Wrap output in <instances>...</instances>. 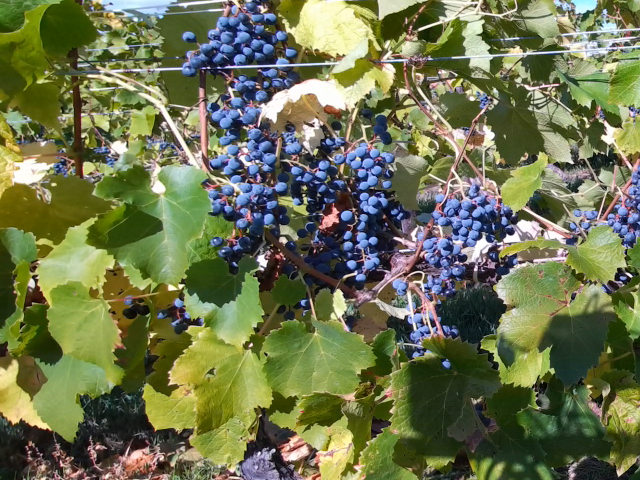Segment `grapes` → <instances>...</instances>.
<instances>
[{
    "label": "grapes",
    "instance_id": "grapes-3",
    "mask_svg": "<svg viewBox=\"0 0 640 480\" xmlns=\"http://www.w3.org/2000/svg\"><path fill=\"white\" fill-rule=\"evenodd\" d=\"M263 0L245 3L246 13H238V5L230 6L231 17L220 16L215 20L217 28H210L206 36L212 42H202L199 52L188 50L181 65L182 77L194 78L201 65L290 63L289 59H275L272 53L278 41H287L286 31H265L266 25H275V13L258 12Z\"/></svg>",
    "mask_w": 640,
    "mask_h": 480
},
{
    "label": "grapes",
    "instance_id": "grapes-2",
    "mask_svg": "<svg viewBox=\"0 0 640 480\" xmlns=\"http://www.w3.org/2000/svg\"><path fill=\"white\" fill-rule=\"evenodd\" d=\"M480 185L473 183L470 186L469 199L462 201L457 198H447L445 195L438 193L434 196V202H444L442 216L439 211L430 213V217L434 219V223L440 227H451V237L441 238L431 237L427 239L423 248L425 249V260L432 264L435 268L443 267L439 278L427 276V281L423 283L425 297L428 301L432 300V293L441 297H449L456 292V281H462L467 266L465 264L453 265L456 261L459 263L466 262L468 255L462 252L461 245H453L454 242L462 241L468 247L473 248L477 245L478 240L482 239V233L488 234L486 241L493 243L495 240L494 232H500L501 239L512 237L515 234V228L511 224L519 222V213L513 211L510 206H504L503 202L499 203V211L497 210L496 200L488 201L485 194L479 193Z\"/></svg>",
    "mask_w": 640,
    "mask_h": 480
},
{
    "label": "grapes",
    "instance_id": "grapes-12",
    "mask_svg": "<svg viewBox=\"0 0 640 480\" xmlns=\"http://www.w3.org/2000/svg\"><path fill=\"white\" fill-rule=\"evenodd\" d=\"M390 288L396 291L397 297H404L406 295V289L408 288V282L403 279H395L391 282Z\"/></svg>",
    "mask_w": 640,
    "mask_h": 480
},
{
    "label": "grapes",
    "instance_id": "grapes-5",
    "mask_svg": "<svg viewBox=\"0 0 640 480\" xmlns=\"http://www.w3.org/2000/svg\"><path fill=\"white\" fill-rule=\"evenodd\" d=\"M183 307L184 302L181 299L176 298L173 301V305H171L167 310L159 311L156 314V318L158 320H164L169 317L172 320L170 326L177 335H182L191 325L202 326L204 324V320L202 318L191 320L192 316L188 314Z\"/></svg>",
    "mask_w": 640,
    "mask_h": 480
},
{
    "label": "grapes",
    "instance_id": "grapes-8",
    "mask_svg": "<svg viewBox=\"0 0 640 480\" xmlns=\"http://www.w3.org/2000/svg\"><path fill=\"white\" fill-rule=\"evenodd\" d=\"M123 303L126 306H131L130 308H125L123 310V316L127 319H134L138 314L145 316L150 313V309L147 306L142 305L143 300L141 298H135L133 295L125 296L123 298Z\"/></svg>",
    "mask_w": 640,
    "mask_h": 480
},
{
    "label": "grapes",
    "instance_id": "grapes-6",
    "mask_svg": "<svg viewBox=\"0 0 640 480\" xmlns=\"http://www.w3.org/2000/svg\"><path fill=\"white\" fill-rule=\"evenodd\" d=\"M424 320V315L421 312H416L413 315L407 316V324L412 325L414 322L416 323V328L411 333L408 334L409 340L416 344V350L411 354L412 358L421 357L424 354H430L431 350L428 348H424L422 345L423 339L430 337V328L427 325H422Z\"/></svg>",
    "mask_w": 640,
    "mask_h": 480
},
{
    "label": "grapes",
    "instance_id": "grapes-13",
    "mask_svg": "<svg viewBox=\"0 0 640 480\" xmlns=\"http://www.w3.org/2000/svg\"><path fill=\"white\" fill-rule=\"evenodd\" d=\"M310 303L311 300L308 297H303L298 303L293 305V308L295 310H299L300 308L303 309V311L300 313V316L305 317L306 314H308L312 309Z\"/></svg>",
    "mask_w": 640,
    "mask_h": 480
},
{
    "label": "grapes",
    "instance_id": "grapes-9",
    "mask_svg": "<svg viewBox=\"0 0 640 480\" xmlns=\"http://www.w3.org/2000/svg\"><path fill=\"white\" fill-rule=\"evenodd\" d=\"M387 119L384 114H380L376 118V124L372 127V131L375 135L380 136V141L383 145H391L392 144V135L389 131H387Z\"/></svg>",
    "mask_w": 640,
    "mask_h": 480
},
{
    "label": "grapes",
    "instance_id": "grapes-14",
    "mask_svg": "<svg viewBox=\"0 0 640 480\" xmlns=\"http://www.w3.org/2000/svg\"><path fill=\"white\" fill-rule=\"evenodd\" d=\"M585 217L588 220H595L598 216V212L596 210H584L581 211L580 209H574L573 210V217L574 218H579V217Z\"/></svg>",
    "mask_w": 640,
    "mask_h": 480
},
{
    "label": "grapes",
    "instance_id": "grapes-17",
    "mask_svg": "<svg viewBox=\"0 0 640 480\" xmlns=\"http://www.w3.org/2000/svg\"><path fill=\"white\" fill-rule=\"evenodd\" d=\"M498 254H499V251L490 249L488 251L487 257L489 258L490 261L496 262V260L499 258Z\"/></svg>",
    "mask_w": 640,
    "mask_h": 480
},
{
    "label": "grapes",
    "instance_id": "grapes-10",
    "mask_svg": "<svg viewBox=\"0 0 640 480\" xmlns=\"http://www.w3.org/2000/svg\"><path fill=\"white\" fill-rule=\"evenodd\" d=\"M303 280L305 281V284L307 286H311L312 284L318 285L319 287H317L314 290V294L318 295L319 292L324 291L325 289H329V293L330 294H334L335 293V288L333 285L326 283L325 281H322L321 279H318L317 277H314L313 275H310L309 273H306L303 276Z\"/></svg>",
    "mask_w": 640,
    "mask_h": 480
},
{
    "label": "grapes",
    "instance_id": "grapes-16",
    "mask_svg": "<svg viewBox=\"0 0 640 480\" xmlns=\"http://www.w3.org/2000/svg\"><path fill=\"white\" fill-rule=\"evenodd\" d=\"M276 314H284V320H294L296 318V313L293 311H287V307L281 305L279 308L275 310Z\"/></svg>",
    "mask_w": 640,
    "mask_h": 480
},
{
    "label": "grapes",
    "instance_id": "grapes-11",
    "mask_svg": "<svg viewBox=\"0 0 640 480\" xmlns=\"http://www.w3.org/2000/svg\"><path fill=\"white\" fill-rule=\"evenodd\" d=\"M346 143V139L343 136L331 137L328 136L322 143L321 149L328 154H332L335 148H340Z\"/></svg>",
    "mask_w": 640,
    "mask_h": 480
},
{
    "label": "grapes",
    "instance_id": "grapes-1",
    "mask_svg": "<svg viewBox=\"0 0 640 480\" xmlns=\"http://www.w3.org/2000/svg\"><path fill=\"white\" fill-rule=\"evenodd\" d=\"M260 75L270 77L271 83L264 80L261 83L263 89L256 90L258 77L252 75L241 74L234 78L229 86L234 89L240 96L231 98L229 94H224L219 98L221 103L228 101L230 108L220 109V105L215 102L207 104V112L210 119L218 125L222 130H227L224 136L218 139L221 146H228L227 153L230 156H238L241 148L238 144H231L232 141H238L242 136L239 131L242 126L250 127L247 130V141L245 148L249 153L245 156L247 162L258 161L262 163L260 167L257 163H250L246 167V173L255 177L259 184L253 181H247L246 174L237 169H243L245 164L228 155H218L216 159L209 162V166L214 171L224 170V175L229 177L232 185H235L242 193L234 200V206L226 205L221 198L222 195L231 196L234 188L230 184H224L217 189L208 192V196L213 200L212 209L209 214L217 217L222 216L228 222H235L238 230L249 228V234L246 237H240L235 240V244L231 247L221 246L224 240L221 236H213L210 243L214 248L221 246L217 250V255L228 263V270L232 275L240 273V262L245 255H255L263 240V231L265 225H274L269 231L277 239L281 237V225H288L291 218L286 215L288 208L282 204H278L277 194L283 197L289 192L287 183L290 181V173L292 176V184L290 185V194L292 203L295 206H301L305 203V198L301 190V185H307L306 190L307 202L306 211L309 214L308 223L305 228L298 229L296 235L305 238L309 233H314L313 243L319 246H327L329 252L321 254L306 255L303 262L307 266L316 268L319 271L336 279H342L357 270V274L347 277L344 284L357 290L364 288L365 272L374 271L379 266V251H391L398 246L396 240L387 237H377L376 233H381L386 225L383 218L386 214L396 228L401 226L402 220L410 219L412 213L405 211L402 204H394L389 202L382 192H374L369 195L366 191L374 188L379 183V177L383 174L385 179L382 183V189L387 190L392 186V182L388 179L393 178V171L385 167V163H393L395 156L391 153L380 152L378 149H370L366 142H361L355 153L336 154L333 157L332 165L326 158L316 159L314 155L307 154L305 161L310 169H317L312 172L304 171L299 165L291 166L287 162L282 164L286 173L277 175L276 184L272 187L263 185L266 182L267 174H272L276 167L277 146L271 139L263 136V132L270 128V124L265 122L259 127L253 126L259 115L262 113L260 106H249L248 101L268 103L274 96V91L270 88L291 87L294 83H298L301 75L292 70V68H274L261 69ZM346 164L356 172L358 181L352 196L360 202L357 205L358 222L355 229L358 231L354 239L353 232L345 230L342 234V248L339 242L331 236H327L317 224L323 221V216L316 211H324L327 207L326 203L336 204L338 197L336 191H342L346 188V182L341 179L330 180L327 184L324 181L327 176L334 178L337 175L338 167L336 165ZM345 256L347 259L344 263H337L333 270L328 263L339 257Z\"/></svg>",
    "mask_w": 640,
    "mask_h": 480
},
{
    "label": "grapes",
    "instance_id": "grapes-7",
    "mask_svg": "<svg viewBox=\"0 0 640 480\" xmlns=\"http://www.w3.org/2000/svg\"><path fill=\"white\" fill-rule=\"evenodd\" d=\"M286 132L282 136L284 143L282 144V151L289 156H295L303 150V146L300 141L295 138L296 126L293 123H287L285 125Z\"/></svg>",
    "mask_w": 640,
    "mask_h": 480
},
{
    "label": "grapes",
    "instance_id": "grapes-4",
    "mask_svg": "<svg viewBox=\"0 0 640 480\" xmlns=\"http://www.w3.org/2000/svg\"><path fill=\"white\" fill-rule=\"evenodd\" d=\"M632 185L628 194L632 198L625 200V207L615 205L613 211L617 212L618 217L613 213L607 216V222H598L597 226L608 225L613 227V232L623 237V246L632 248L636 242V237L640 236V167L632 172Z\"/></svg>",
    "mask_w": 640,
    "mask_h": 480
},
{
    "label": "grapes",
    "instance_id": "grapes-15",
    "mask_svg": "<svg viewBox=\"0 0 640 480\" xmlns=\"http://www.w3.org/2000/svg\"><path fill=\"white\" fill-rule=\"evenodd\" d=\"M441 330L446 338L451 337L452 339H455L459 333V328L456 325L449 327L447 324H443L441 326Z\"/></svg>",
    "mask_w": 640,
    "mask_h": 480
}]
</instances>
